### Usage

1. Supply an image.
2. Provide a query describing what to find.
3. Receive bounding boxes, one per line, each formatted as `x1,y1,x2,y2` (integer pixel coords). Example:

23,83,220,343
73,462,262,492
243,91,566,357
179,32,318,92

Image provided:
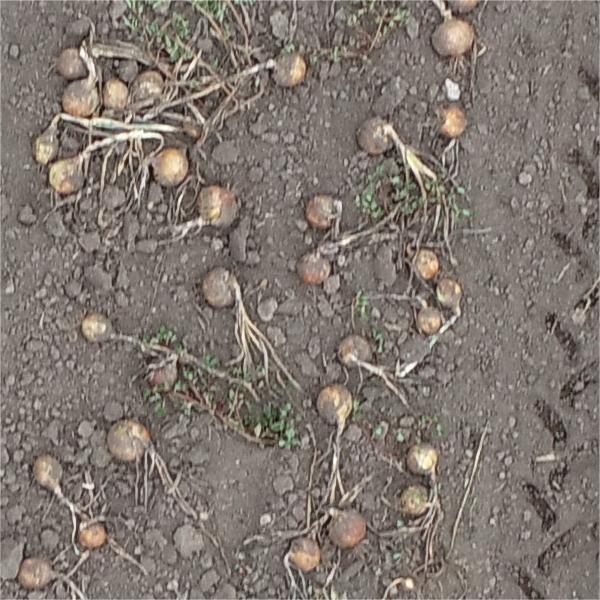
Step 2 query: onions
296,254,328,283
62,80,98,116
30,454,62,488
144,348,174,387
396,484,426,517
433,20,471,55
47,156,82,195
286,538,320,572
115,59,138,83
303,195,338,230
76,519,107,549
199,186,237,225
198,268,235,307
79,311,109,341
54,50,84,77
354,117,390,154
325,507,366,547
405,444,436,472
101,78,129,109
336,332,369,366
31,132,62,163
313,387,354,424
128,71,162,105
436,105,467,136
414,305,442,333
447,0,479,15
386,573,416,598
17,557,52,588
434,278,463,309
149,146,186,184
107,418,147,459
411,250,442,279
271,49,307,86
